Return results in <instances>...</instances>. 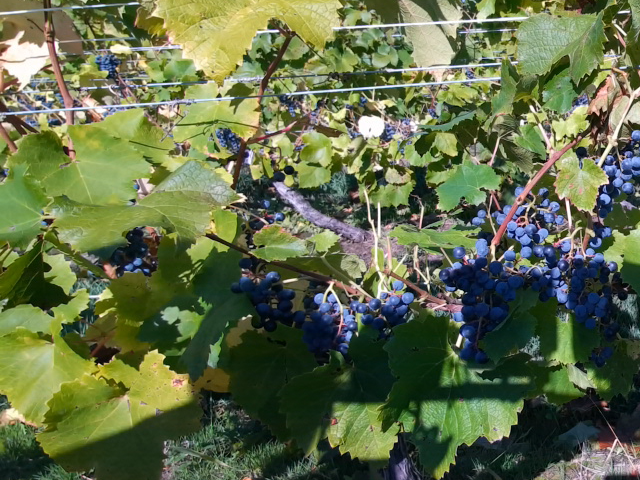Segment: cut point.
<instances>
[{
    "mask_svg": "<svg viewBox=\"0 0 640 480\" xmlns=\"http://www.w3.org/2000/svg\"><path fill=\"white\" fill-rule=\"evenodd\" d=\"M528 195H531V197L533 198V201L528 203V206H526V209H530L532 205H534L536 203V195L534 194V192H530L527 191Z\"/></svg>",
    "mask_w": 640,
    "mask_h": 480,
    "instance_id": "cut-point-2",
    "label": "cut point"
},
{
    "mask_svg": "<svg viewBox=\"0 0 640 480\" xmlns=\"http://www.w3.org/2000/svg\"><path fill=\"white\" fill-rule=\"evenodd\" d=\"M582 230L585 232L589 231V228L585 225H576L575 228L573 229V231L570 233L571 237H575L578 234V231Z\"/></svg>",
    "mask_w": 640,
    "mask_h": 480,
    "instance_id": "cut-point-1",
    "label": "cut point"
}]
</instances>
